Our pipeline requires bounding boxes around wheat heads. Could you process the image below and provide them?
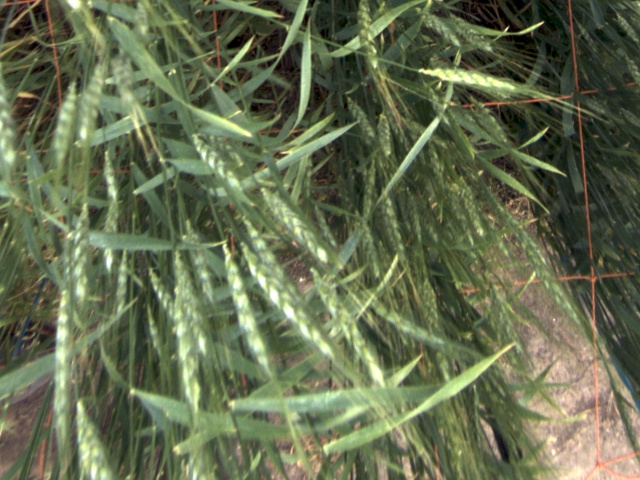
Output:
[354,1,379,69]
[420,65,508,90]
[112,58,139,98]
[173,295,203,410]
[245,221,302,302]
[79,407,105,480]
[420,280,441,328]
[456,21,490,50]
[0,64,20,163]
[348,99,373,137]
[416,10,454,44]
[245,250,325,347]
[219,244,266,364]
[79,66,105,142]
[516,234,575,325]
[317,273,380,379]
[354,216,380,277]
[619,15,640,42]
[471,99,506,144]
[480,270,507,303]
[112,253,126,313]
[363,163,375,218]
[195,133,239,190]
[173,261,207,353]
[263,189,333,261]
[373,303,440,348]
[377,115,394,151]
[102,207,117,245]
[145,270,179,319]
[383,199,404,252]
[52,293,68,433]
[626,58,640,86]
[456,180,483,231]
[49,82,75,158]
[74,207,91,295]
[104,154,119,197]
